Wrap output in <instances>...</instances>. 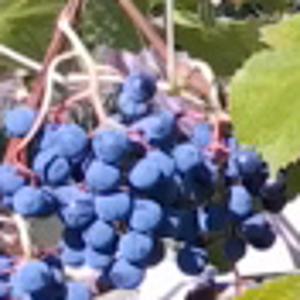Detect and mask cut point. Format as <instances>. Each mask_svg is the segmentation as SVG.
<instances>
[{"label":"cut point","mask_w":300,"mask_h":300,"mask_svg":"<svg viewBox=\"0 0 300 300\" xmlns=\"http://www.w3.org/2000/svg\"><path fill=\"white\" fill-rule=\"evenodd\" d=\"M55 26L62 33H64L68 41L71 43L73 49L66 53L57 55L50 63L46 83V96L44 102L41 104L40 110L35 114V121L33 122L30 131L27 133L26 143L28 145H33L35 143V139L39 136L42 127L44 126V116L47 113L48 107L53 99V85L56 69L61 61L69 60L78 55L85 65L93 107L96 111H101L103 109V102L99 92V80L97 78L96 68L92 56L82 45L80 38L76 35L72 27L68 25L62 18H57L55 20Z\"/></svg>","instance_id":"obj_1"},{"label":"cut point","mask_w":300,"mask_h":300,"mask_svg":"<svg viewBox=\"0 0 300 300\" xmlns=\"http://www.w3.org/2000/svg\"><path fill=\"white\" fill-rule=\"evenodd\" d=\"M188 66L197 68L199 70V75L206 80L209 93V103L211 104V113L214 117H219L221 115V103L218 95V75L208 63L199 58H189Z\"/></svg>","instance_id":"obj_2"}]
</instances>
